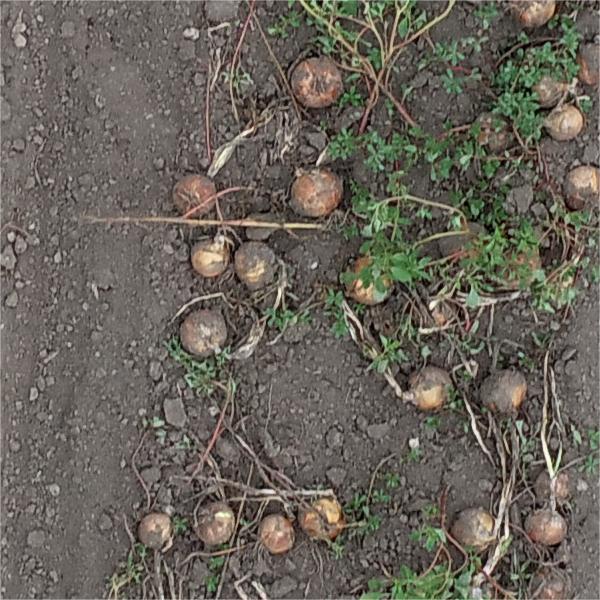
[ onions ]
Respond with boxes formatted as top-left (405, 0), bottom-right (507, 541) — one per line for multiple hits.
top-left (298, 498), bottom-right (342, 539)
top-left (135, 511), bottom-right (171, 548)
top-left (233, 242), bottom-right (275, 287)
top-left (288, 55), bottom-right (338, 106)
top-left (257, 514), bottom-right (293, 553)
top-left (476, 369), bottom-right (527, 414)
top-left (191, 234), bottom-right (230, 274)
top-left (172, 173), bottom-right (215, 218)
top-left (576, 42), bottom-right (598, 85)
top-left (451, 505), bottom-right (493, 548)
top-left (563, 162), bottom-right (597, 207)
top-left (342, 258), bottom-right (394, 302)
top-left (545, 104), bottom-right (582, 138)
top-left (525, 507), bottom-right (564, 545)
top-left (515, 0), bottom-right (553, 30)
top-left (430, 296), bottom-right (460, 329)
top-left (534, 74), bottom-right (564, 105)
top-left (408, 364), bottom-right (449, 410)
top-left (543, 471), bottom-right (577, 506)
top-left (290, 166), bottom-right (341, 214)
top-left (179, 309), bottom-right (225, 358)
top-left (530, 565), bottom-right (569, 598)
top-left (195, 505), bottom-right (232, 543)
